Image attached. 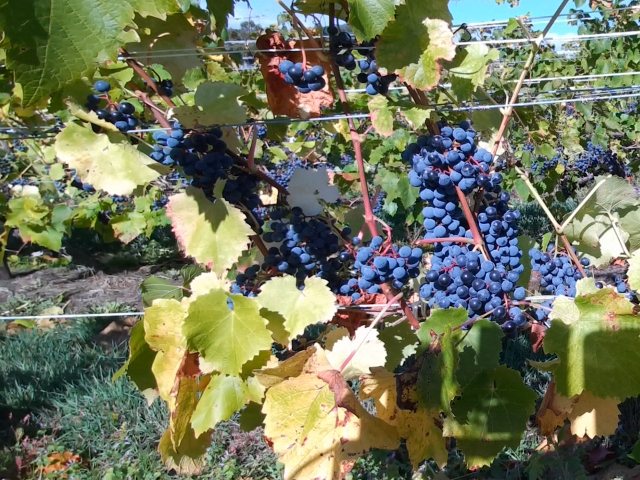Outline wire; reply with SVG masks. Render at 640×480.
<instances>
[{"label":"wire","mask_w":640,"mask_h":480,"mask_svg":"<svg viewBox=\"0 0 640 480\" xmlns=\"http://www.w3.org/2000/svg\"><path fill=\"white\" fill-rule=\"evenodd\" d=\"M625 98H640V92L623 93V94L611 95V96H590V97L551 99V100H541L539 102L495 103V104L458 106V107H437L436 111L437 112H460V111H473V110H485V109H497V108L541 107L543 105H551V104H566V103H579V102H592V101H613V100H621Z\"/></svg>","instance_id":"wire-1"},{"label":"wire","mask_w":640,"mask_h":480,"mask_svg":"<svg viewBox=\"0 0 640 480\" xmlns=\"http://www.w3.org/2000/svg\"><path fill=\"white\" fill-rule=\"evenodd\" d=\"M640 35V30L628 31H608L598 33H585L581 35H558L552 37H534V38H509L504 40H468L465 42H456V47H467L470 45H506L512 43H537V42H555L560 40H583L587 38H600L610 36H630Z\"/></svg>","instance_id":"wire-2"},{"label":"wire","mask_w":640,"mask_h":480,"mask_svg":"<svg viewBox=\"0 0 640 480\" xmlns=\"http://www.w3.org/2000/svg\"><path fill=\"white\" fill-rule=\"evenodd\" d=\"M301 47H270V48H253V49H237V50H220V51H204L196 53H167V54H153L145 56H130L122 57L118 56L117 60L120 62H132V61H147L155 59H169V58H198L206 56H222V55H240V54H255V53H273V52H301Z\"/></svg>","instance_id":"wire-3"},{"label":"wire","mask_w":640,"mask_h":480,"mask_svg":"<svg viewBox=\"0 0 640 480\" xmlns=\"http://www.w3.org/2000/svg\"><path fill=\"white\" fill-rule=\"evenodd\" d=\"M370 113H362V114H335L334 116H316L310 118H302L299 117L289 118V119H274V120H257V121H249V122H236V123H220V128H238V127H251V126H259V125H276V124H291V123H313L319 121H339L344 119H364L370 118Z\"/></svg>","instance_id":"wire-4"},{"label":"wire","mask_w":640,"mask_h":480,"mask_svg":"<svg viewBox=\"0 0 640 480\" xmlns=\"http://www.w3.org/2000/svg\"><path fill=\"white\" fill-rule=\"evenodd\" d=\"M143 311L137 312H113V313H60V314H48L44 316H31L24 314H17L14 316H0V321H17L19 319L28 321H46L50 319H63V318H116V317H140L143 316Z\"/></svg>","instance_id":"wire-5"}]
</instances>
